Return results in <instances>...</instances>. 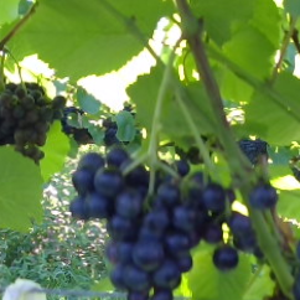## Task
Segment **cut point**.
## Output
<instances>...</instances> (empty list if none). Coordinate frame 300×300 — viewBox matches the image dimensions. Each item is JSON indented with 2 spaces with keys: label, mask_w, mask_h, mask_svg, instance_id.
<instances>
[{
  "label": "cut point",
  "mask_w": 300,
  "mask_h": 300,
  "mask_svg": "<svg viewBox=\"0 0 300 300\" xmlns=\"http://www.w3.org/2000/svg\"><path fill=\"white\" fill-rule=\"evenodd\" d=\"M184 39L185 37L180 35L175 41L170 54L167 55V62L164 67L162 79L157 91L156 103L153 111L150 144L147 151L135 160L137 165L145 167L146 169H150L152 164L159 161V117L163 105L165 90L172 76L173 58L179 48V45Z\"/></svg>",
  "instance_id": "6a23745f"
},
{
  "label": "cut point",
  "mask_w": 300,
  "mask_h": 300,
  "mask_svg": "<svg viewBox=\"0 0 300 300\" xmlns=\"http://www.w3.org/2000/svg\"><path fill=\"white\" fill-rule=\"evenodd\" d=\"M2 52L7 53L10 56L11 60L13 61V63L15 64V66L17 68V72H18L19 78H20V83H24L23 75L21 72V66H19L18 61L16 60L14 55L11 53L10 50H8L7 46L2 47Z\"/></svg>",
  "instance_id": "7d7e1d6f"
}]
</instances>
